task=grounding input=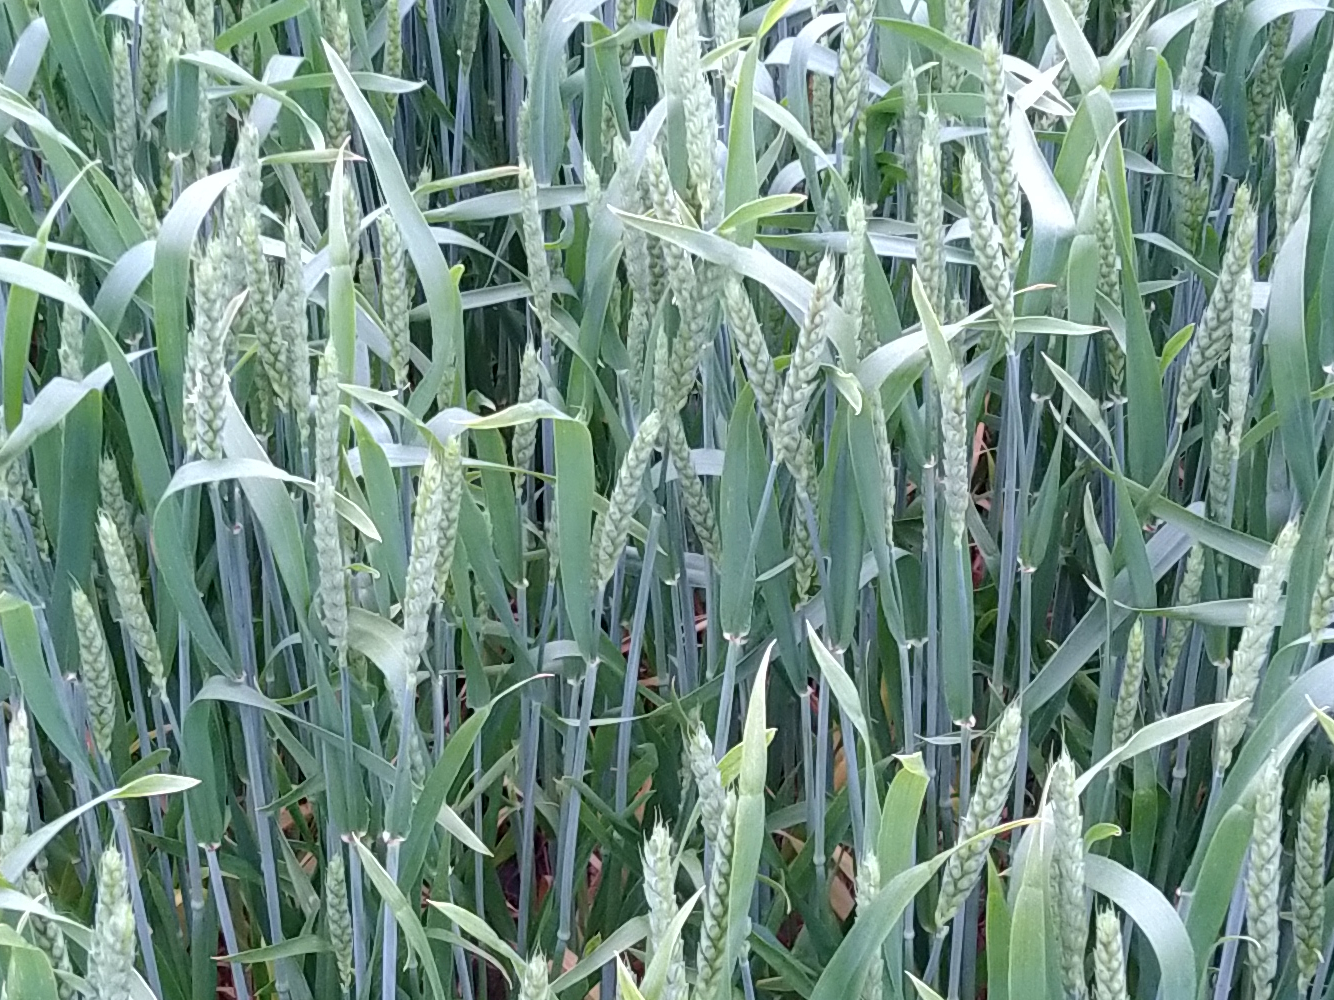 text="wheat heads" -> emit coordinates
[1294,782,1329,974]
[201,79,224,174]
[615,0,634,80]
[1106,319,1121,393]
[855,858,883,1000]
[1053,760,1088,983]
[312,349,344,636]
[1290,11,1334,221]
[609,270,621,330]
[409,727,427,801]
[241,220,288,400]
[518,100,531,164]
[671,266,704,405]
[284,223,309,416]
[96,847,123,929]
[811,72,831,147]
[26,484,50,559]
[1174,206,1259,416]
[1094,193,1122,309]
[343,184,361,266]
[1181,179,1211,253]
[584,159,601,223]
[1094,910,1139,1000]
[1159,546,1205,686]
[378,213,411,381]
[941,0,970,90]
[237,0,255,87]
[694,791,739,1000]
[461,0,481,69]
[980,0,1009,35]
[1228,272,1254,451]
[1179,0,1216,97]
[774,256,836,466]
[59,273,84,381]
[313,0,345,24]
[872,395,894,536]
[6,453,50,556]
[548,492,560,579]
[1112,622,1145,749]
[678,0,716,207]
[520,165,550,319]
[935,711,1023,924]
[903,66,917,181]
[598,414,661,578]
[646,149,692,299]
[844,200,876,357]
[513,348,539,488]
[1245,765,1282,1000]
[627,296,648,401]
[194,0,214,48]
[623,221,655,312]
[316,343,340,485]
[917,143,945,316]
[326,856,353,982]
[23,868,85,1000]
[643,830,690,1000]
[667,415,723,565]
[962,150,1014,340]
[96,515,164,678]
[326,10,351,150]
[525,0,542,78]
[984,35,1021,263]
[1217,525,1302,764]
[834,0,882,135]
[796,156,850,279]
[1226,183,1252,248]
[644,216,665,305]
[196,82,210,180]
[941,366,968,536]
[194,245,230,457]
[1040,0,1095,111]
[80,930,100,1000]
[255,363,270,434]
[237,124,264,229]
[434,438,464,594]
[684,730,727,838]
[72,589,114,751]
[724,278,779,431]
[860,294,879,359]
[383,0,402,114]
[439,343,457,410]
[139,0,163,104]
[654,328,671,416]
[403,458,442,677]
[136,182,158,240]
[1247,13,1293,154]
[793,439,818,595]
[1209,426,1231,523]
[601,92,616,160]
[94,906,136,1000]
[183,336,197,445]
[98,458,138,571]
[219,127,263,292]
[313,485,347,640]
[159,149,174,216]
[0,281,46,527]
[112,35,135,209]
[0,525,7,614]
[1174,107,1194,185]
[1274,110,1296,243]
[2,708,32,862]
[297,148,315,206]
[8,137,29,200]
